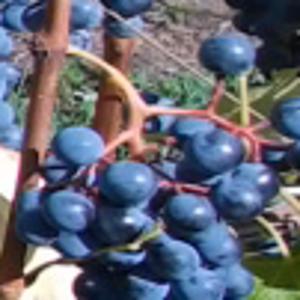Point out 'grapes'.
<instances>
[{"mask_svg": "<svg viewBox=\"0 0 300 300\" xmlns=\"http://www.w3.org/2000/svg\"><path fill=\"white\" fill-rule=\"evenodd\" d=\"M74 12L71 31L68 33L69 46L90 52L93 39L86 30L101 28L108 35L118 40L140 39L139 34L121 20L111 17L104 12L106 7L115 13L122 14L135 23L144 32L145 20L141 13L150 6V0H71Z\"/></svg>", "mask_w": 300, "mask_h": 300, "instance_id": "grapes-3", "label": "grapes"}, {"mask_svg": "<svg viewBox=\"0 0 300 300\" xmlns=\"http://www.w3.org/2000/svg\"><path fill=\"white\" fill-rule=\"evenodd\" d=\"M50 0H0V148L19 152L24 147L15 111L6 101L20 81V69L10 62L13 41L8 30L38 32L49 14Z\"/></svg>", "mask_w": 300, "mask_h": 300, "instance_id": "grapes-2", "label": "grapes"}, {"mask_svg": "<svg viewBox=\"0 0 300 300\" xmlns=\"http://www.w3.org/2000/svg\"><path fill=\"white\" fill-rule=\"evenodd\" d=\"M272 124L292 146L246 162L242 138L208 114H159L106 144L88 126L60 130L41 168L53 187L17 196L20 246L79 260L78 300H241L256 286L229 223H247L300 174V98Z\"/></svg>", "mask_w": 300, "mask_h": 300, "instance_id": "grapes-1", "label": "grapes"}, {"mask_svg": "<svg viewBox=\"0 0 300 300\" xmlns=\"http://www.w3.org/2000/svg\"><path fill=\"white\" fill-rule=\"evenodd\" d=\"M196 58L208 73L235 78L252 69L257 61V49L237 34H219L200 41Z\"/></svg>", "mask_w": 300, "mask_h": 300, "instance_id": "grapes-4", "label": "grapes"}]
</instances>
